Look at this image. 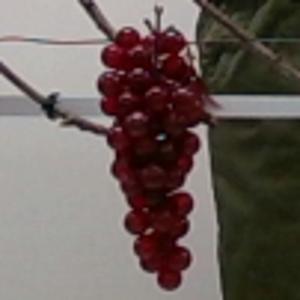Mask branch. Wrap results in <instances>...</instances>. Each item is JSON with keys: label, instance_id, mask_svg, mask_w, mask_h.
<instances>
[{"label": "branch", "instance_id": "2", "mask_svg": "<svg viewBox=\"0 0 300 300\" xmlns=\"http://www.w3.org/2000/svg\"><path fill=\"white\" fill-rule=\"evenodd\" d=\"M202 12L214 20L227 34L232 36L248 50L254 52L281 75L300 87V76L285 62L276 56L267 46L258 40L246 27L222 10L218 9L209 0H191Z\"/></svg>", "mask_w": 300, "mask_h": 300}, {"label": "branch", "instance_id": "3", "mask_svg": "<svg viewBox=\"0 0 300 300\" xmlns=\"http://www.w3.org/2000/svg\"><path fill=\"white\" fill-rule=\"evenodd\" d=\"M82 11L86 14L88 19L94 25V28L101 32L107 38L109 43H114L115 34L117 29L107 16L103 13L95 0H75Z\"/></svg>", "mask_w": 300, "mask_h": 300}, {"label": "branch", "instance_id": "1", "mask_svg": "<svg viewBox=\"0 0 300 300\" xmlns=\"http://www.w3.org/2000/svg\"><path fill=\"white\" fill-rule=\"evenodd\" d=\"M0 75L8 80L17 90L24 94L28 99L40 107L41 112L44 113L47 120L58 123L59 128H76L79 132H89V134L96 137L105 138L106 131L109 127L102 123L86 118H81L75 114L59 107V99L61 92H50L46 96L39 93L31 85H29L23 78L17 75L4 61L0 59Z\"/></svg>", "mask_w": 300, "mask_h": 300}, {"label": "branch", "instance_id": "4", "mask_svg": "<svg viewBox=\"0 0 300 300\" xmlns=\"http://www.w3.org/2000/svg\"><path fill=\"white\" fill-rule=\"evenodd\" d=\"M201 126H205L206 128L211 129L212 131L217 129V123L215 121V116L206 109L205 116L201 120L199 124Z\"/></svg>", "mask_w": 300, "mask_h": 300}]
</instances>
